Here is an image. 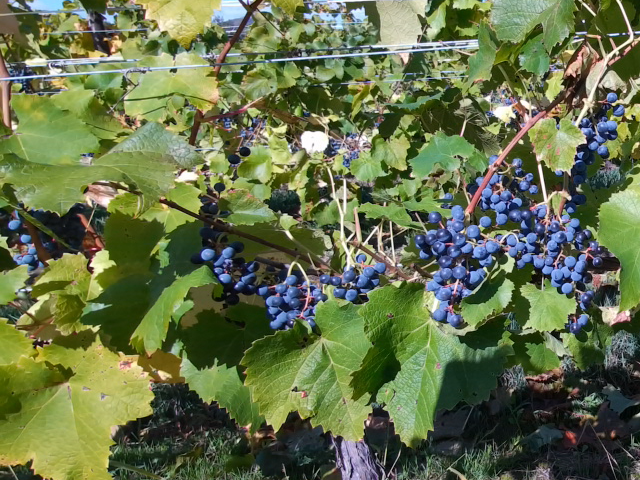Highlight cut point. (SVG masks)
<instances>
[{
    "label": "cut point",
    "instance_id": "cut-point-1",
    "mask_svg": "<svg viewBox=\"0 0 640 480\" xmlns=\"http://www.w3.org/2000/svg\"><path fill=\"white\" fill-rule=\"evenodd\" d=\"M298 259H299V258H297V257H294V258H293V261H292V263H291V265H290V267H289V270H293V268H294L295 264H296V266H297V268H298L299 270H304V266L301 264V262H299V261H298Z\"/></svg>",
    "mask_w": 640,
    "mask_h": 480
},
{
    "label": "cut point",
    "instance_id": "cut-point-2",
    "mask_svg": "<svg viewBox=\"0 0 640 480\" xmlns=\"http://www.w3.org/2000/svg\"><path fill=\"white\" fill-rule=\"evenodd\" d=\"M560 193H562V190H558V191H555V192L549 194L548 197L545 199V203H548L551 200L552 197H554L555 195L560 194Z\"/></svg>",
    "mask_w": 640,
    "mask_h": 480
}]
</instances>
